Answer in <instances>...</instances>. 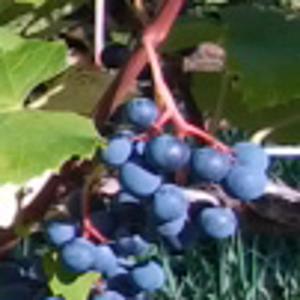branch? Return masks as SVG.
<instances>
[{
	"mask_svg": "<svg viewBox=\"0 0 300 300\" xmlns=\"http://www.w3.org/2000/svg\"><path fill=\"white\" fill-rule=\"evenodd\" d=\"M88 170L87 161L76 156L67 158L60 173L49 178L48 182L32 195L22 212L24 222L33 224L46 218L59 201L69 194L77 177L87 174Z\"/></svg>",
	"mask_w": 300,
	"mask_h": 300,
	"instance_id": "branch-2",
	"label": "branch"
},
{
	"mask_svg": "<svg viewBox=\"0 0 300 300\" xmlns=\"http://www.w3.org/2000/svg\"><path fill=\"white\" fill-rule=\"evenodd\" d=\"M185 10L181 0H166L159 14L149 23L134 50L122 77L113 82L98 106L93 128L99 134L109 132L114 124V116L122 110L126 98L141 80L155 46L168 37L170 27L180 19Z\"/></svg>",
	"mask_w": 300,
	"mask_h": 300,
	"instance_id": "branch-1",
	"label": "branch"
},
{
	"mask_svg": "<svg viewBox=\"0 0 300 300\" xmlns=\"http://www.w3.org/2000/svg\"><path fill=\"white\" fill-rule=\"evenodd\" d=\"M17 241L15 231L11 229H3L0 231V254L6 255L12 252Z\"/></svg>",
	"mask_w": 300,
	"mask_h": 300,
	"instance_id": "branch-3",
	"label": "branch"
}]
</instances>
